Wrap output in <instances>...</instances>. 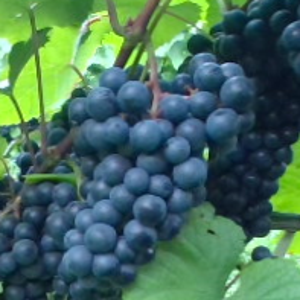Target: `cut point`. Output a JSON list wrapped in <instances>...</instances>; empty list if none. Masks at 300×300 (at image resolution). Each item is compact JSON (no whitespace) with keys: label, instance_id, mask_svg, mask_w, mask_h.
I'll use <instances>...</instances> for the list:
<instances>
[{"label":"cut point","instance_id":"cut-point-1","mask_svg":"<svg viewBox=\"0 0 300 300\" xmlns=\"http://www.w3.org/2000/svg\"><path fill=\"white\" fill-rule=\"evenodd\" d=\"M140 41L144 44L147 65V76L143 80V83L146 86H158L160 84V80L158 79V64L152 40L150 39V33L144 31L140 36Z\"/></svg>","mask_w":300,"mask_h":300}]
</instances>
